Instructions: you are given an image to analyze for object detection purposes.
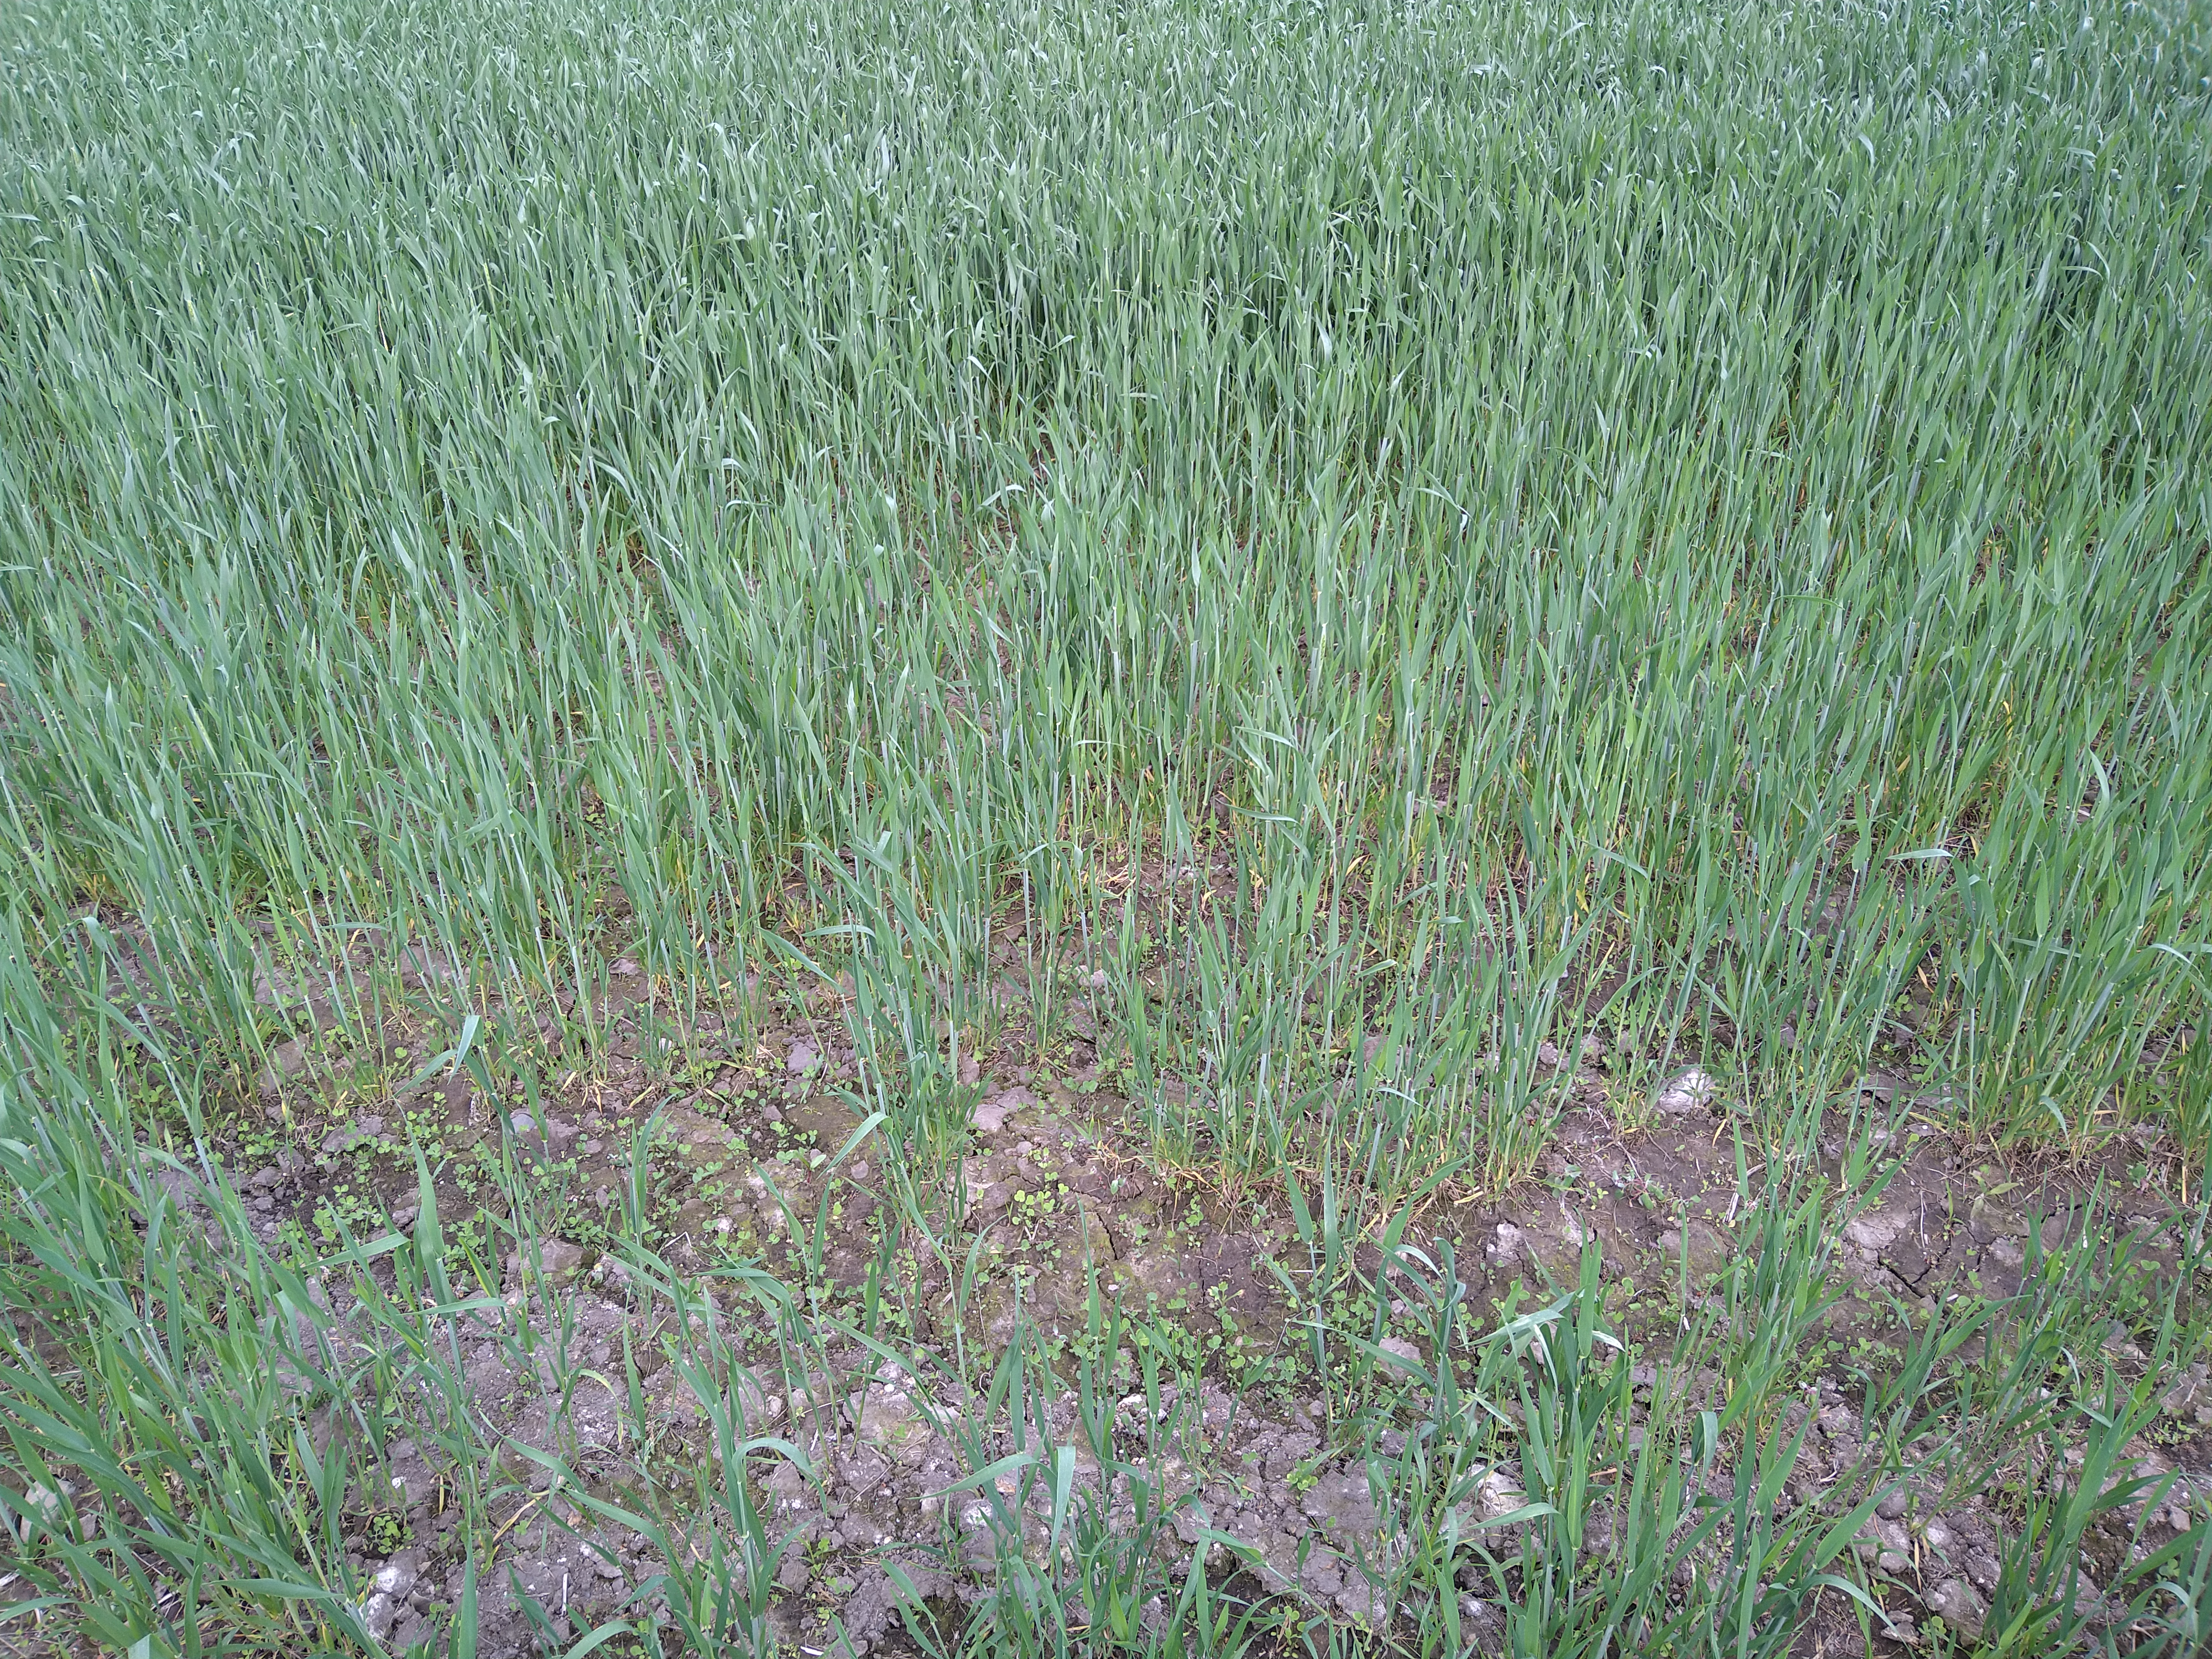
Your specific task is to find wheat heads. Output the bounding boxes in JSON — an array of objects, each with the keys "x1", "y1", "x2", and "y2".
[
  {"x1": 187, "y1": 300, "x2": 194, "y2": 320},
  {"x1": 350, "y1": 115, "x2": 357, "y2": 135},
  {"x1": 400, "y1": 407, "x2": 404, "y2": 428},
  {"x1": 483, "y1": 262, "x2": 491, "y2": 293},
  {"x1": 73, "y1": 147, "x2": 79, "y2": 167},
  {"x1": 302, "y1": 231, "x2": 311, "y2": 254}
]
